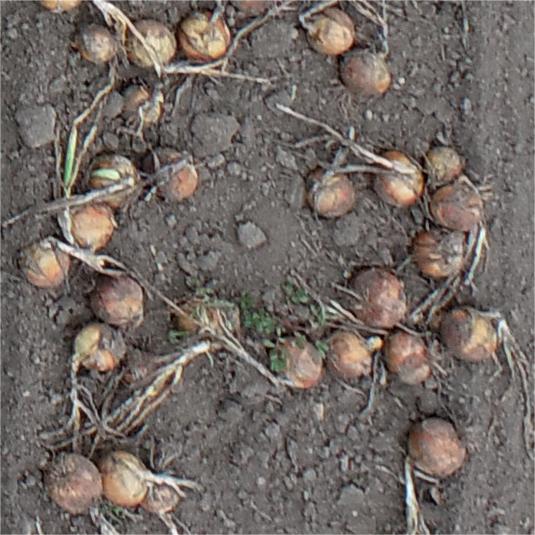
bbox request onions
[234,0,276,14]
[21,240,66,289]
[122,85,158,123]
[144,478,181,514]
[286,348,323,389]
[93,275,142,323]
[302,7,353,54]
[438,309,499,363]
[73,323,123,367]
[42,452,101,514]
[100,454,148,507]
[383,329,431,382]
[91,156,135,193]
[67,200,114,250]
[162,167,198,201]
[337,49,390,96]
[311,175,354,216]
[326,331,375,380]
[412,229,463,276]
[38,0,80,12]
[169,302,198,332]
[347,268,406,328]
[404,418,464,478]
[128,20,173,66]
[425,145,462,185]
[178,14,228,59]
[427,178,481,231]
[375,150,420,205]
[76,25,117,62]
